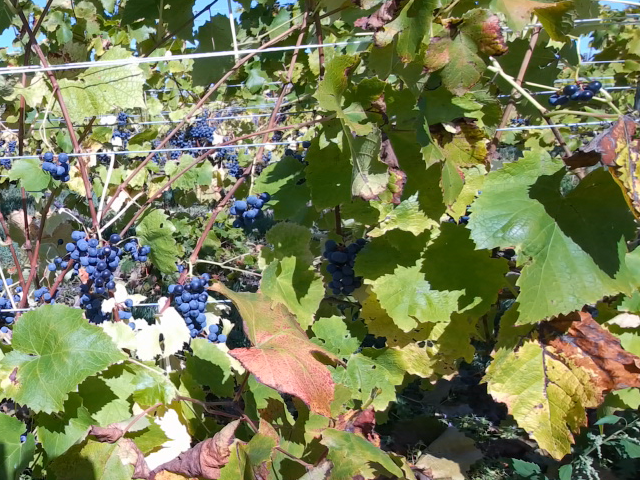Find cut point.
<instances>
[{"label":"cut point","instance_id":"cut-point-1","mask_svg":"<svg viewBox=\"0 0 640 480\" xmlns=\"http://www.w3.org/2000/svg\"><path fill=\"white\" fill-rule=\"evenodd\" d=\"M54 94H55V91H54V89H52L51 96H50L48 104H47V109H46L45 114H44V119H47V116H48L49 111H50L52 100L54 99Z\"/></svg>","mask_w":640,"mask_h":480}]
</instances>
